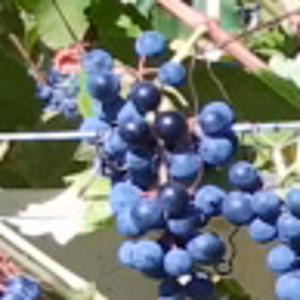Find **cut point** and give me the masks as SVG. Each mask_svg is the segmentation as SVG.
<instances>
[{
  "instance_id": "6a23745f",
  "label": "cut point",
  "mask_w": 300,
  "mask_h": 300,
  "mask_svg": "<svg viewBox=\"0 0 300 300\" xmlns=\"http://www.w3.org/2000/svg\"><path fill=\"white\" fill-rule=\"evenodd\" d=\"M204 33L200 32L199 30L194 31L192 34L188 35L186 39L184 40V43L181 45L179 50L177 51L176 56L174 57V60L176 62H180L187 51V49L190 47L191 43L196 40L197 38L201 37Z\"/></svg>"
}]
</instances>
